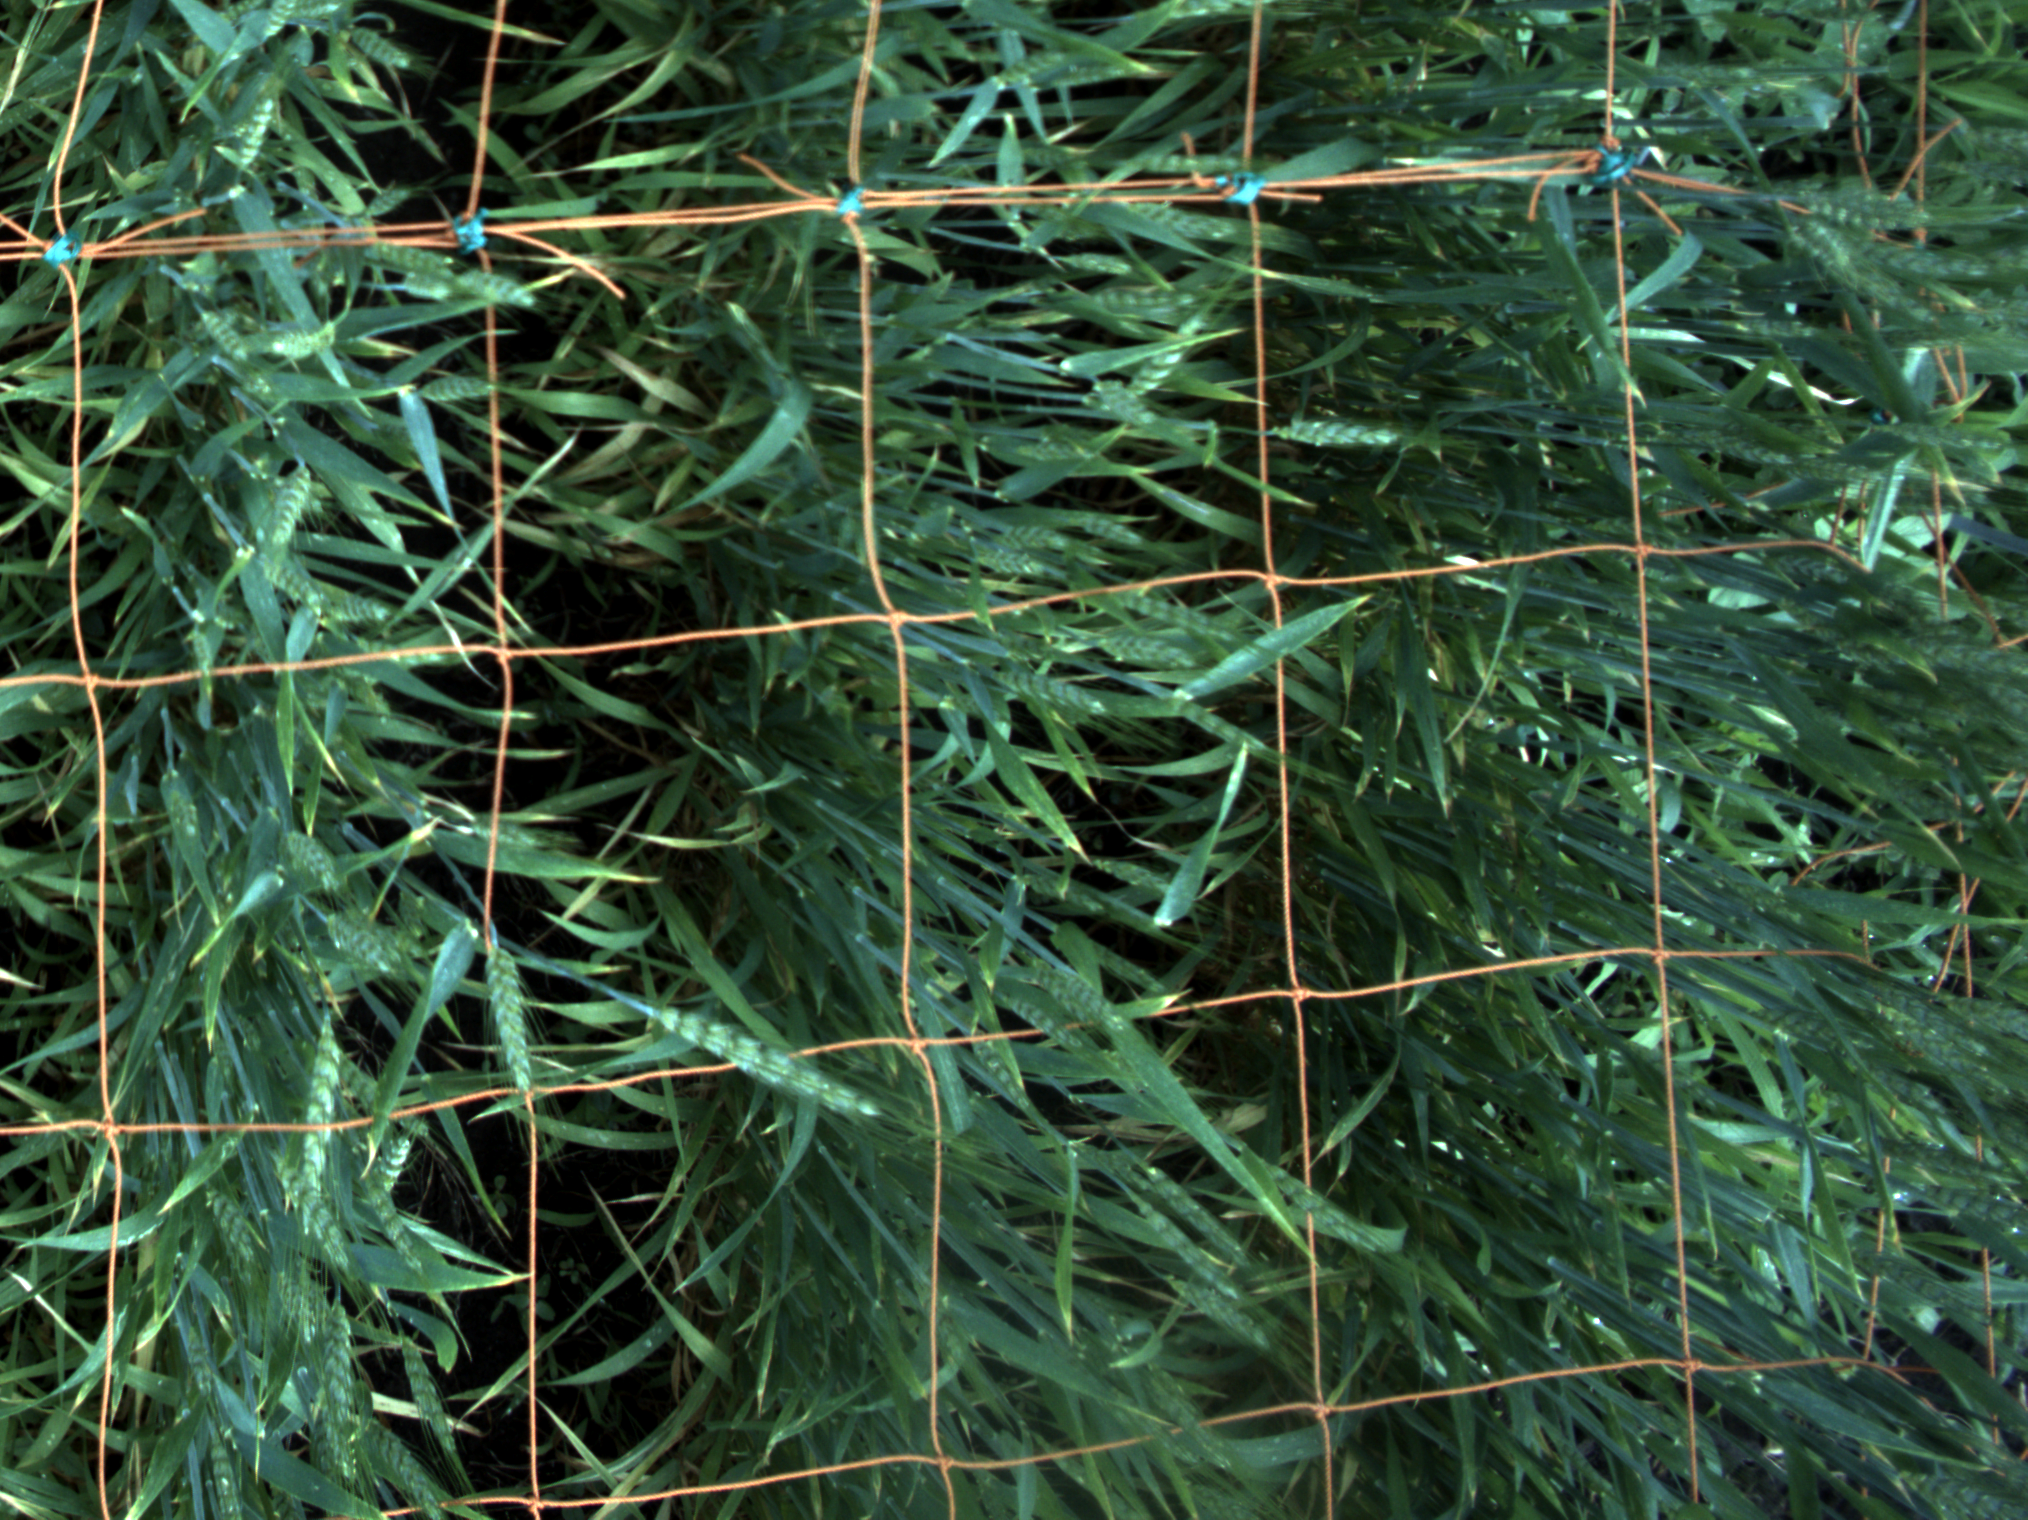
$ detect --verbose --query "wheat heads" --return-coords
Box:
[1641,562,1683,585]
[1885,774,1978,828]
[1981,590,2027,630]
[1879,1130,2010,1177]
[322,1301,356,1427]
[189,632,213,677]
[1860,683,1926,714]
[325,907,403,977]
[370,1416,443,1519]
[349,26,410,69]
[1091,857,1174,893]
[1022,872,1106,911]
[1724,873,1804,923]
[167,786,200,838]
[912,1275,966,1359]
[211,1031,235,1076]
[272,1267,317,1342]
[1787,230,1835,268]
[1082,509,1142,547]
[1777,552,1849,586]
[974,550,1042,577]
[1527,133,1600,149]
[484,948,533,1092]
[1142,1366,1234,1472]
[237,97,273,169]
[1884,317,1984,349]
[323,588,391,622]
[653,1006,885,1118]
[1978,741,2024,768]
[1279,418,1401,447]
[214,115,252,140]
[1888,585,1958,637]
[1874,419,2000,451]
[1867,998,2011,1098]
[1896,489,1990,505]
[471,822,535,849]
[1144,152,1242,176]
[1739,317,1815,340]
[1843,643,1895,677]
[1768,169,1831,196]
[1009,440,1079,463]
[285,827,338,881]
[1121,315,1204,395]
[187,1325,212,1401]
[199,309,249,361]
[269,320,335,357]
[1810,4,1883,23]
[1909,634,2028,682]
[204,1183,255,1262]
[1004,992,1083,1047]
[1622,1034,1717,1112]
[1748,1004,1849,1048]
[1171,695,1265,753]
[1968,122,2027,159]
[1092,377,1157,428]
[1806,216,1850,268]
[1784,456,1870,484]
[1000,523,1067,552]
[1072,1143,1154,1192]
[1615,22,1677,43]
[260,469,324,514]
[991,629,1062,666]
[1850,1246,1990,1315]
[1663,62,1752,82]
[1590,515,1658,536]
[1613,599,1669,623]
[999,49,1071,84]
[1146,1164,1251,1270]
[378,420,412,443]
[291,0,345,17]
[1119,590,1235,643]
[991,667,1106,714]
[262,555,320,606]
[268,469,311,543]
[1089,287,1196,312]
[1111,1388,1200,1466]
[207,1437,239,1513]
[264,0,301,39]
[314,1382,356,1481]
[362,188,410,220]
[300,1018,340,1189]
[455,267,536,307]
[965,1029,1032,1114]
[1091,942,1166,989]
[393,1105,429,1137]
[215,600,254,633]
[1777,594,1849,644]
[397,1328,456,1452]
[1092,634,1198,670]
[1022,145,1078,171]
[1668,423,1792,467]
[1048,62,1128,85]
[1639,1401,1702,1450]
[1922,1180,2017,1223]
[1132,1194,1237,1300]
[363,1168,424,1273]
[1026,953,1087,1014]
[372,239,453,281]
[1806,186,1929,230]
[1055,967,1123,1029]
[355,633,444,666]
[235,1013,262,1050]
[416,374,496,404]
[949,695,978,714]
[370,922,426,959]
[1169,0,1293,21]
[334,664,391,717]
[1860,1056,1950,1116]
[1850,233,1991,280]
[1066,250,1132,278]
[1127,201,1239,241]
[1936,156,2027,188]
[1556,1435,1602,1485]
[1865,979,1987,1060]
[1931,987,2026,1041]
[268,1482,296,1519]
[1983,677,2026,716]
[1255,1154,1383,1252]
[1164,1273,1270,1351]
[1025,197,1072,224]
[239,369,276,399]
[217,0,267,24]
[371,1133,411,1190]
[338,1047,380,1106]
[272,1153,350,1266]
[1863,267,1936,325]
[1900,1465,2026,1519]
